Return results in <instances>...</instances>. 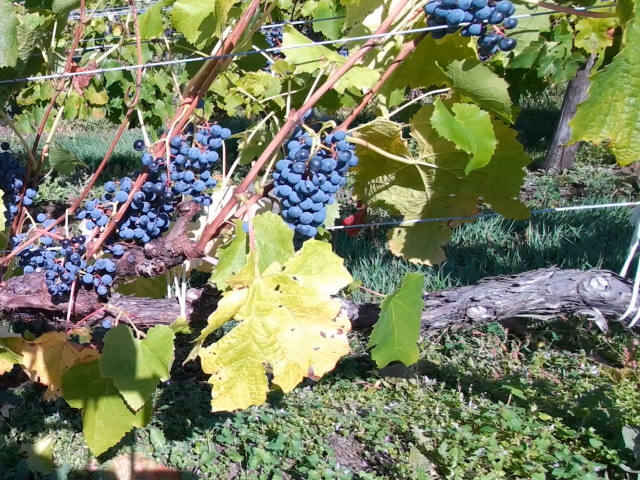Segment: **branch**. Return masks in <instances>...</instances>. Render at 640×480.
<instances>
[{
    "instance_id": "branch-14",
    "label": "branch",
    "mask_w": 640,
    "mask_h": 480,
    "mask_svg": "<svg viewBox=\"0 0 640 480\" xmlns=\"http://www.w3.org/2000/svg\"><path fill=\"white\" fill-rule=\"evenodd\" d=\"M183 106H186V102L182 103V106L179 107L178 111H176V114L173 116L172 121L169 123V125L167 126V131H170L171 127L173 126V124L175 123L176 119L180 116V114L182 113L183 110Z\"/></svg>"
},
{
    "instance_id": "branch-10",
    "label": "branch",
    "mask_w": 640,
    "mask_h": 480,
    "mask_svg": "<svg viewBox=\"0 0 640 480\" xmlns=\"http://www.w3.org/2000/svg\"><path fill=\"white\" fill-rule=\"evenodd\" d=\"M66 218L65 214H61L57 219H56V223L52 224L50 226H47L45 228H42L41 230H39L36 234L32 235L31 237H29L28 239H26L25 241H23L17 248H15L13 251H11L9 254H7L4 258H2L0 260V264L4 265L5 263H7L11 258H13L15 255H17L18 253H20L24 247L28 246L29 244H31L33 241H35L36 239H38L40 236H42L43 234H45L48 229L56 224H60L64 219Z\"/></svg>"
},
{
    "instance_id": "branch-7",
    "label": "branch",
    "mask_w": 640,
    "mask_h": 480,
    "mask_svg": "<svg viewBox=\"0 0 640 480\" xmlns=\"http://www.w3.org/2000/svg\"><path fill=\"white\" fill-rule=\"evenodd\" d=\"M66 88V84H65V78L60 79L55 91L53 92V95L50 99V103L48 105V107L46 108V110L44 111V117L41 119L40 125H39V129L37 131V135L35 137V141L33 142L31 151L33 154V157H36L37 154V147L38 144L40 143L43 131H44V127L46 124L47 119L49 118V114L52 111V109L54 108L56 99L60 93L61 90H64Z\"/></svg>"
},
{
    "instance_id": "branch-1",
    "label": "branch",
    "mask_w": 640,
    "mask_h": 480,
    "mask_svg": "<svg viewBox=\"0 0 640 480\" xmlns=\"http://www.w3.org/2000/svg\"><path fill=\"white\" fill-rule=\"evenodd\" d=\"M376 43L375 39H369L365 45H363L359 51L349 60H347L344 65L329 79V81L318 90L312 97L307 99L302 105L301 109L294 114L284 125V129L281 130L276 137L269 144L266 151L262 153V155L258 158V160L252 166L247 177L241 182V184L237 188V192L234 194L232 199L226 204V206L222 209V211L217 215L215 220L209 225L207 230L201 236L197 243V250L202 252L204 250V245L208 241L209 237L213 234L215 229L222 223L224 218L227 216L229 211L238 203L244 190L250 184V182L254 179L256 174L259 171V168L264 166L265 161L268 157L275 151V148L278 146L279 142L292 130L296 127L300 119L306 114V110L316 101H318L321 97H323L328 90L337 82V80L343 76L351 66L355 65L363 55L370 50Z\"/></svg>"
},
{
    "instance_id": "branch-13",
    "label": "branch",
    "mask_w": 640,
    "mask_h": 480,
    "mask_svg": "<svg viewBox=\"0 0 640 480\" xmlns=\"http://www.w3.org/2000/svg\"><path fill=\"white\" fill-rule=\"evenodd\" d=\"M44 159H45V155H42L40 157V159L38 160L37 168H36V171H35V175L33 176V179L31 180V186L32 187H35V185H36V183H37V181H38V179L40 177Z\"/></svg>"
},
{
    "instance_id": "branch-6",
    "label": "branch",
    "mask_w": 640,
    "mask_h": 480,
    "mask_svg": "<svg viewBox=\"0 0 640 480\" xmlns=\"http://www.w3.org/2000/svg\"><path fill=\"white\" fill-rule=\"evenodd\" d=\"M31 170H32V161H28L27 169L24 176V182L21 187V192H18L19 203L17 204V207H18L17 213L14 215V221L11 226V231H10L11 236L21 233V224H22V221L26 218V213L22 212L23 211L22 199H23V196H25V189H26V185H28V180L31 174Z\"/></svg>"
},
{
    "instance_id": "branch-11",
    "label": "branch",
    "mask_w": 640,
    "mask_h": 480,
    "mask_svg": "<svg viewBox=\"0 0 640 480\" xmlns=\"http://www.w3.org/2000/svg\"><path fill=\"white\" fill-rule=\"evenodd\" d=\"M130 9L133 17V30L135 35V45H136V53H137V61L136 64L142 63V51H141V43H140V33L138 27V14L136 11L135 2H130Z\"/></svg>"
},
{
    "instance_id": "branch-9",
    "label": "branch",
    "mask_w": 640,
    "mask_h": 480,
    "mask_svg": "<svg viewBox=\"0 0 640 480\" xmlns=\"http://www.w3.org/2000/svg\"><path fill=\"white\" fill-rule=\"evenodd\" d=\"M85 7H86V0H81L80 3V20H79V25L77 26V35L75 36L74 40H73V45L71 48V51L69 53V57L67 58V61L65 63V66L63 68L64 72H68L69 68L71 66V63L74 59L77 47H78V43L80 41V38L82 37L84 30H85Z\"/></svg>"
},
{
    "instance_id": "branch-3",
    "label": "branch",
    "mask_w": 640,
    "mask_h": 480,
    "mask_svg": "<svg viewBox=\"0 0 640 480\" xmlns=\"http://www.w3.org/2000/svg\"><path fill=\"white\" fill-rule=\"evenodd\" d=\"M142 71H143V69H137V81H136V85H135L134 97H133L132 103H131V105L129 107L128 113L124 117V119L122 121V124L120 125V127H119V129L117 131V134L112 139L111 144H110L105 156L103 157L101 162L98 164V166L94 170L89 183L85 186V188L83 189V191L81 192V194L79 195L77 200L74 201L73 205L68 210V215L69 216H73L74 215V211L77 209L78 205L84 200L85 196L88 194L90 189L94 186V183L96 181V178H97L98 174L101 172V169L103 168V166L109 160V158H110V156H111V154H112V152H113L118 140L121 138V135L123 134V132H124L126 126H127L128 121L132 117L133 112L135 110V107H136V105L138 103V99H139L140 87H141V84H142Z\"/></svg>"
},
{
    "instance_id": "branch-2",
    "label": "branch",
    "mask_w": 640,
    "mask_h": 480,
    "mask_svg": "<svg viewBox=\"0 0 640 480\" xmlns=\"http://www.w3.org/2000/svg\"><path fill=\"white\" fill-rule=\"evenodd\" d=\"M429 36L428 32H423V33H417L408 43V45L403 48L399 54L397 55V58L389 65V67L386 69V71L384 72V75L381 76L377 82L368 90L367 94L364 96V98L362 99V101H360L352 110L351 113H349L346 118L344 119V122L339 125L337 127V130L339 132H343L345 131L350 125L352 120H354L356 118V115L364 108L368 105V103L370 102V100L372 99V97L374 96V94L379 90V88L389 80V78L391 77L392 73L396 70V67H398L404 60V57L410 53L413 48L416 46V44L421 40V39H425Z\"/></svg>"
},
{
    "instance_id": "branch-12",
    "label": "branch",
    "mask_w": 640,
    "mask_h": 480,
    "mask_svg": "<svg viewBox=\"0 0 640 480\" xmlns=\"http://www.w3.org/2000/svg\"><path fill=\"white\" fill-rule=\"evenodd\" d=\"M410 2V0H400L396 6L394 7V9L392 10V13H390L388 15V17L386 18V20L384 21V23L381 25V27L375 31H373V33H378L381 31H386L392 24V22L394 21V19L399 15L400 11L403 9V7L405 5H407Z\"/></svg>"
},
{
    "instance_id": "branch-8",
    "label": "branch",
    "mask_w": 640,
    "mask_h": 480,
    "mask_svg": "<svg viewBox=\"0 0 640 480\" xmlns=\"http://www.w3.org/2000/svg\"><path fill=\"white\" fill-rule=\"evenodd\" d=\"M260 3H261V0H256L249 7L247 13L243 15V17L239 21L237 27L230 34V36L227 38V40L224 43V48H225V52L226 53H229L231 47L233 46V44L238 41V38L240 37V35L243 32V30L246 28V25H247L250 17L252 16L254 10L259 6Z\"/></svg>"
},
{
    "instance_id": "branch-5",
    "label": "branch",
    "mask_w": 640,
    "mask_h": 480,
    "mask_svg": "<svg viewBox=\"0 0 640 480\" xmlns=\"http://www.w3.org/2000/svg\"><path fill=\"white\" fill-rule=\"evenodd\" d=\"M149 171L148 167L144 166L142 168V173L134 180L133 188L128 192L127 201L124 202L119 210L112 216L106 228L99 234L97 240L92 244V246L87 250L84 254V260L89 262L91 260V256L96 252V250L103 244L105 238L108 234L114 229L118 220L125 214L126 210L130 207V204L133 201V195L139 190L145 178L148 177Z\"/></svg>"
},
{
    "instance_id": "branch-4",
    "label": "branch",
    "mask_w": 640,
    "mask_h": 480,
    "mask_svg": "<svg viewBox=\"0 0 640 480\" xmlns=\"http://www.w3.org/2000/svg\"><path fill=\"white\" fill-rule=\"evenodd\" d=\"M226 61H227V59L218 60V61H211L210 64L207 66L206 70L204 71L202 76L199 78L198 82L196 83L195 87L192 89V91L190 93V96L194 97V100H193L192 104L189 106L188 110L182 116V118L180 119L178 124L174 127L173 131H171V135L169 137V140H173L174 135L179 133V130L183 127V125L185 124L186 120L189 118V116L193 113L194 109L197 107L201 96H203L205 94L206 90L209 88V86L211 85L212 81L218 75L219 70L221 68V65L223 64V62H226ZM214 66H215L214 71L211 73L209 78L204 83L205 79L210 74V72H211V70L213 69Z\"/></svg>"
}]
</instances>
